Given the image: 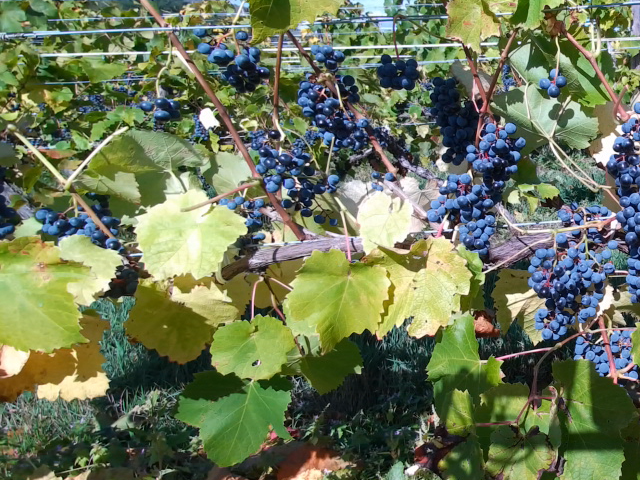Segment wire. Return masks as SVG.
I'll use <instances>...</instances> for the list:
<instances>
[{"label":"wire","mask_w":640,"mask_h":480,"mask_svg":"<svg viewBox=\"0 0 640 480\" xmlns=\"http://www.w3.org/2000/svg\"><path fill=\"white\" fill-rule=\"evenodd\" d=\"M250 28H251L250 24H211V25H196V26H188V27L116 28V29H95V30H86V31L6 33V34H0V39L56 37V36H88V35H97V34H118V33L190 32V31H198V30L250 29Z\"/></svg>","instance_id":"wire-1"},{"label":"wire","mask_w":640,"mask_h":480,"mask_svg":"<svg viewBox=\"0 0 640 480\" xmlns=\"http://www.w3.org/2000/svg\"><path fill=\"white\" fill-rule=\"evenodd\" d=\"M461 42L456 43H424V44H410L400 43L396 45H382V44H362V45H334V50H364V49H380V50H396L398 49H426V48H458L461 47Z\"/></svg>","instance_id":"wire-2"},{"label":"wire","mask_w":640,"mask_h":480,"mask_svg":"<svg viewBox=\"0 0 640 480\" xmlns=\"http://www.w3.org/2000/svg\"><path fill=\"white\" fill-rule=\"evenodd\" d=\"M346 235L340 236H321V237H305L294 240H285V241H264V242H253V243H245V244H237L230 245L229 250H239V249H247V248H255V247H267V246H288V245H296L307 242H318V241H328V240H346Z\"/></svg>","instance_id":"wire-3"},{"label":"wire","mask_w":640,"mask_h":480,"mask_svg":"<svg viewBox=\"0 0 640 480\" xmlns=\"http://www.w3.org/2000/svg\"><path fill=\"white\" fill-rule=\"evenodd\" d=\"M116 55L149 56L150 52L147 50H135V51L114 50V51L92 52V53H41L40 57L41 58H94V57H108V56H116Z\"/></svg>","instance_id":"wire-4"},{"label":"wire","mask_w":640,"mask_h":480,"mask_svg":"<svg viewBox=\"0 0 640 480\" xmlns=\"http://www.w3.org/2000/svg\"><path fill=\"white\" fill-rule=\"evenodd\" d=\"M629 6H640V1L554 6V7H550V8H545L544 12L545 13H552V12H556V11H566V10L620 8V7H629Z\"/></svg>","instance_id":"wire-5"},{"label":"wire","mask_w":640,"mask_h":480,"mask_svg":"<svg viewBox=\"0 0 640 480\" xmlns=\"http://www.w3.org/2000/svg\"><path fill=\"white\" fill-rule=\"evenodd\" d=\"M348 22H387V23H394L395 19L394 18H389V17H346V18H331V19H324V20H318L316 22L317 26L320 25H326V24H333V23H348Z\"/></svg>","instance_id":"wire-6"},{"label":"wire","mask_w":640,"mask_h":480,"mask_svg":"<svg viewBox=\"0 0 640 480\" xmlns=\"http://www.w3.org/2000/svg\"><path fill=\"white\" fill-rule=\"evenodd\" d=\"M437 19L447 20L448 16L446 14H435V15H419V16H412V17H397L396 21L397 22H414V21H421V20H437Z\"/></svg>","instance_id":"wire-7"}]
</instances>
